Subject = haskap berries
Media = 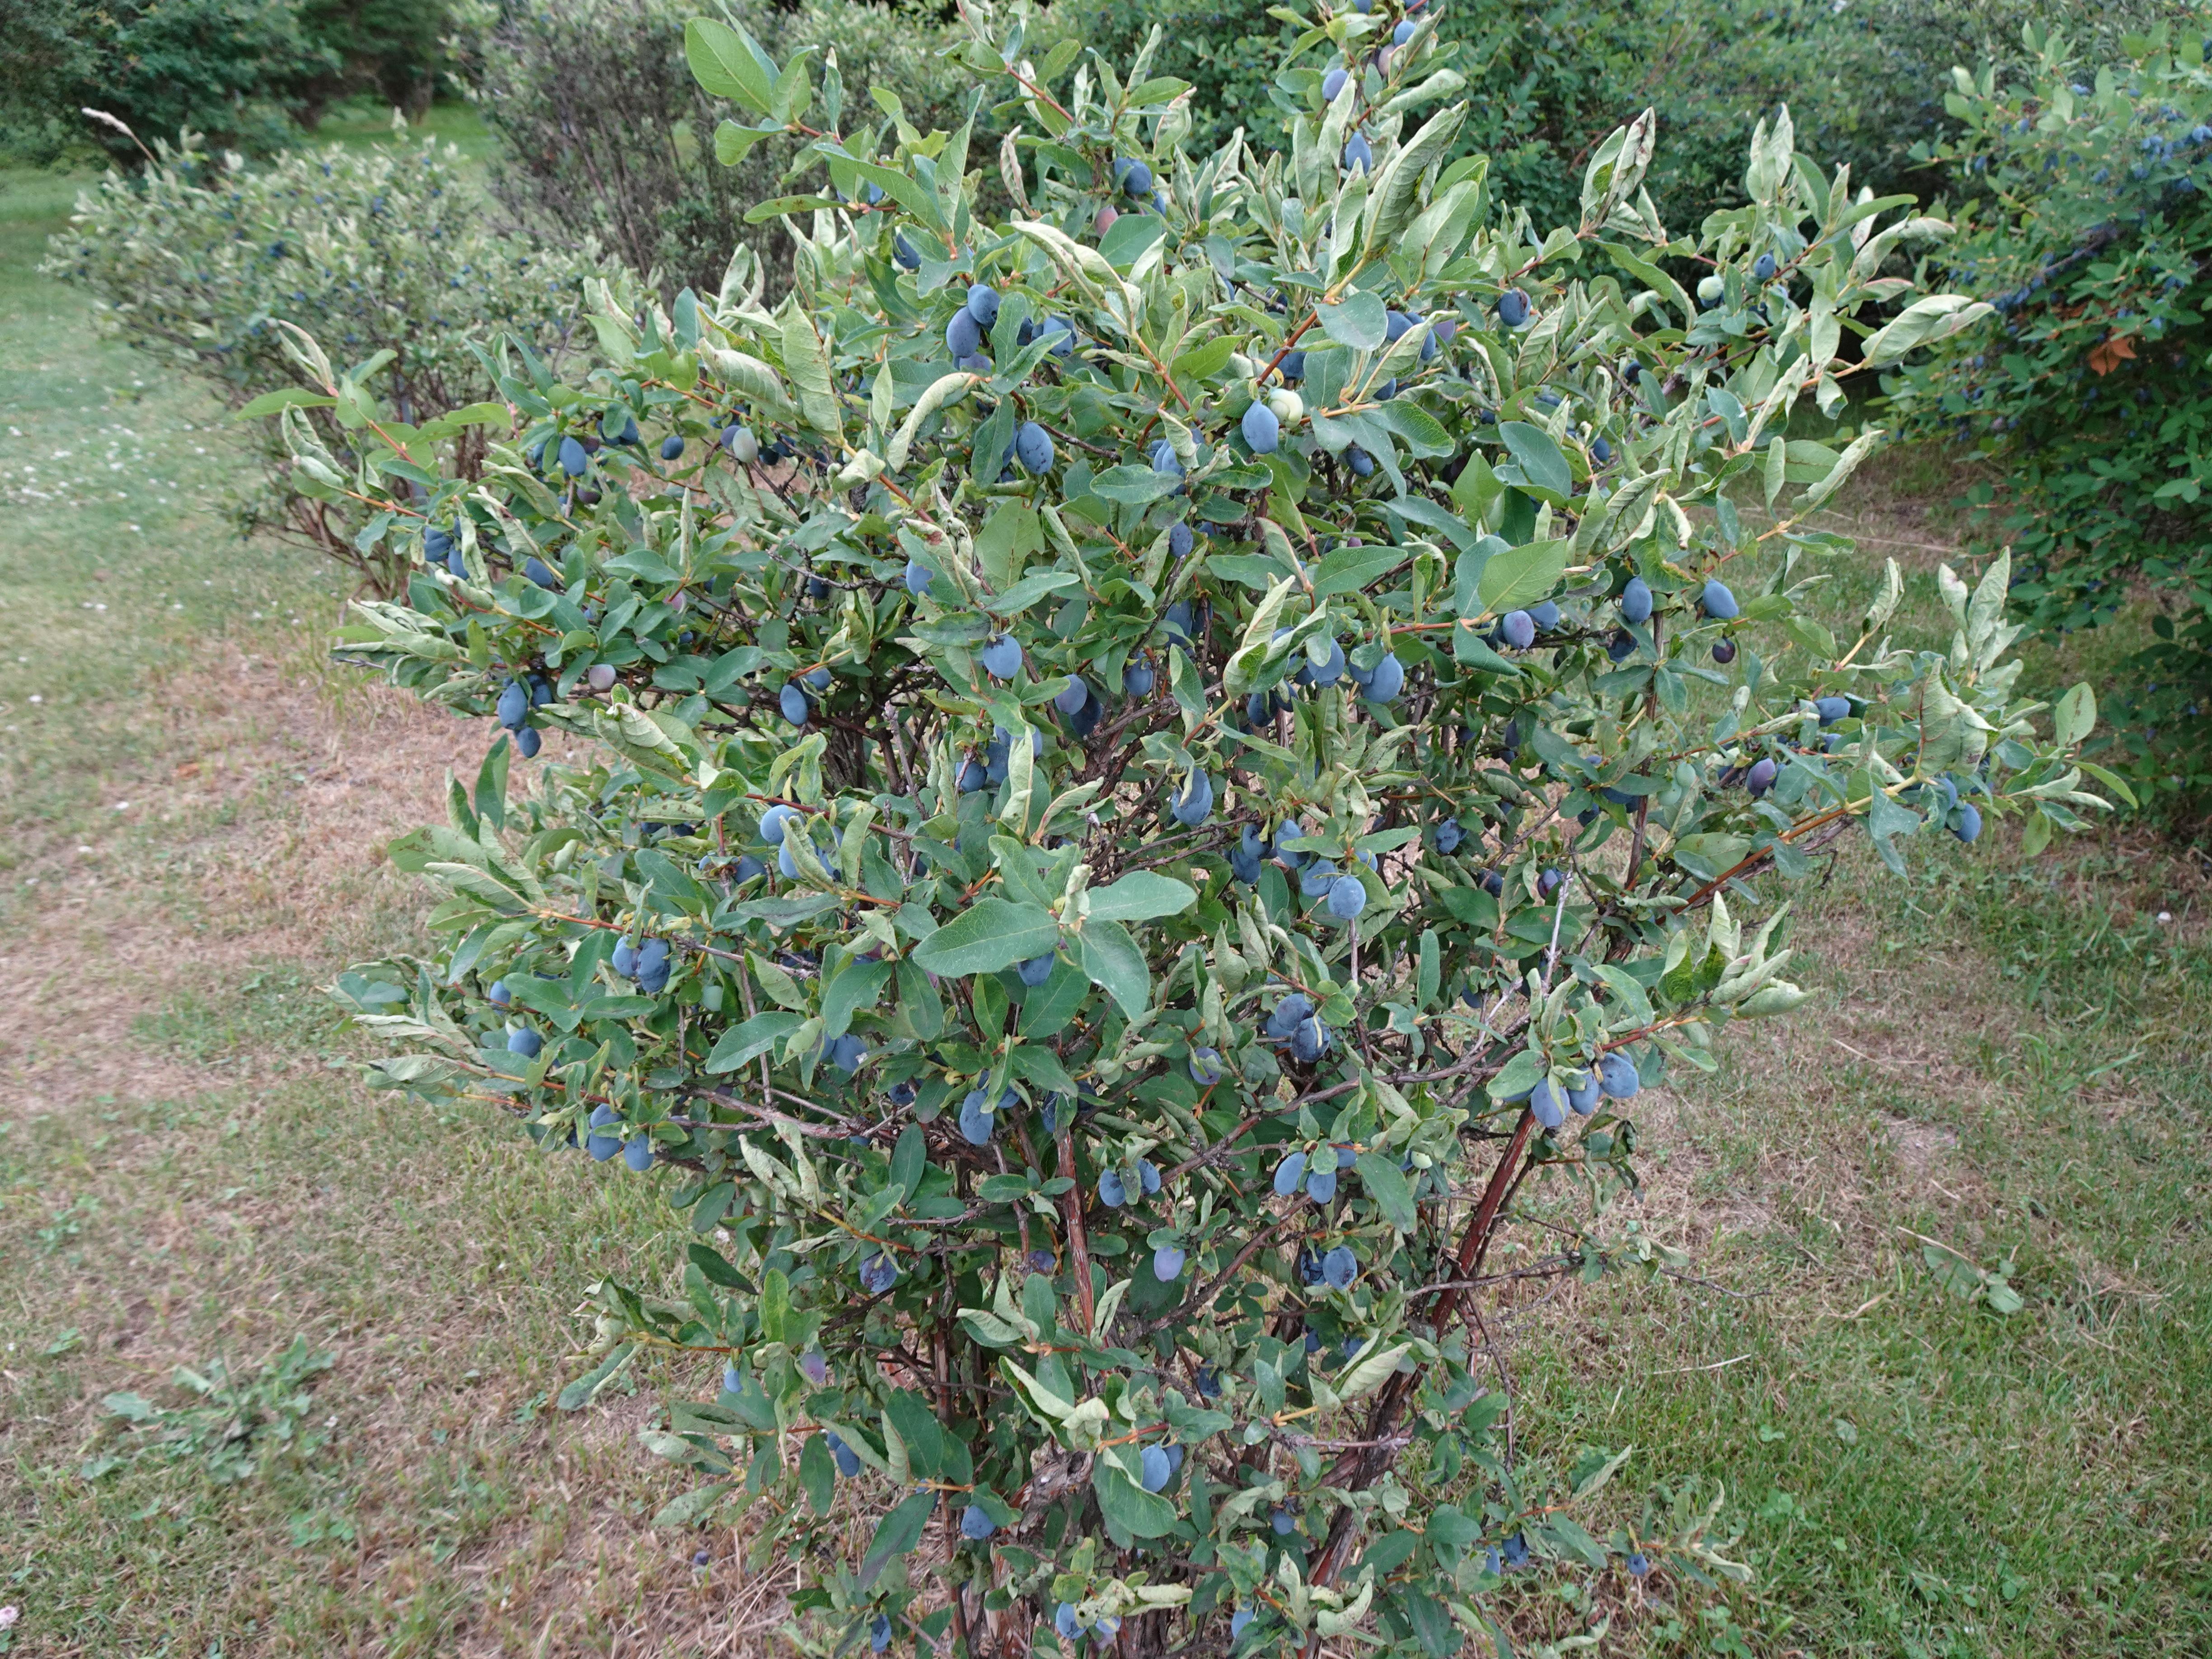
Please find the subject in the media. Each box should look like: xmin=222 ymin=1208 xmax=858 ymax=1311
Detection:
xmin=1700 ymin=297 xmax=1719 ymax=307
xmin=1052 ymin=313 xmax=1081 ymax=342
xmin=1070 ymin=688 xmax=1100 ymax=734
xmin=1593 ymin=437 xmax=1610 ymax=461
xmin=591 ymin=1105 xmax=615 ymax=1126
xmin=969 ymin=284 xmax=1001 ymax=324
xmin=1608 ymin=648 xmax=1627 ymax=662
xmin=961 ymin=1088 xmax=997 ymax=1146
xmin=871 ymin=1617 xmax=891 ymax=1647
xmin=703 ymin=987 xmax=724 ymax=1012
xmin=1539 ymin=762 xmax=1555 ymax=783
xmin=1703 ymin=579 xmax=1738 ymax=618
xmin=448 ymin=544 xmax=470 ymax=580
xmin=1268 ymin=1015 xmax=1297 ymax=1046
xmin=1648 ymin=915 xmax=1656 ymax=924
xmin=1820 ymin=734 xmax=1844 ymax=751
xmin=837 ymin=190 xmax=848 ymax=203
xmin=1378 ymin=45 xmax=1397 ymax=74
xmin=842 ymin=451 xmax=851 ymax=463
xmin=1944 ymin=778 xmax=1958 ymax=810
xmin=849 ymin=1135 xmax=872 ymax=1147
xmin=567 ymin=1129 xmax=580 ymax=1147
xmin=1372 ymin=818 xmax=1387 ymax=834
xmin=670 ymin=1115 xmax=693 ymax=1131
xmin=1293 ymin=667 xmax=1314 ymax=685
xmin=819 ymin=824 xmax=847 ymax=879
xmin=1750 ymin=303 xmax=1767 ymax=316
xmin=1500 ymin=610 xmax=1538 ymax=652
xmin=1349 ymin=0 xmax=1371 ymax=11
xmin=1147 ymin=440 xmax=1165 ymax=456
xmin=1406 ymin=0 xmax=1427 ymax=11
xmin=1137 ymin=1158 xmax=1162 ymax=1193
xmin=1788 ymin=741 xmax=1801 ymax=750
xmin=479 ymin=591 xmax=494 ymax=609
xmin=1752 ymin=758 xmax=1776 ymax=788
xmin=1265 ymin=287 xmax=1287 ymax=312
xmin=983 ymin=633 xmax=1023 ymax=677
xmin=955 ymin=760 xmax=985 ymax=792
xmin=1247 ymin=691 xmax=1279 ymax=726
xmin=1333 ymin=1141 xmax=1359 ymax=1167
xmin=1484 ymin=1544 xmax=1501 ymax=1576
xmin=1479 ymin=409 xmax=1495 ymax=425
xmin=834 ymin=1443 xmax=860 ymax=1477
xmin=1173 ymin=766 xmax=1216 ymax=825
xmin=1949 ymin=800 xmax=1981 ymax=841
xmin=1593 ymin=1055 xmax=1639 ymax=1100
xmin=1345 ymin=131 xmax=1371 ymax=173
xmin=1000 ymin=466 xmax=1015 ymax=482
xmin=1315 ymin=757 xmax=1320 ymax=778
xmin=425 ymin=535 xmax=453 ymax=562
xmin=641 ymin=821 xmax=663 ymax=833
xmin=1627 ymin=1552 xmax=1648 ymax=1575
xmin=613 ymin=944 xmax=640 ymax=975
xmin=913 ymin=861 xmax=926 ymax=878
xmin=1294 ymin=1021 xmax=1328 ymax=1061
xmin=1409 ymin=1150 xmax=1432 ymax=1169
xmin=1002 ymin=419 xmax=1018 ymax=466
xmin=906 ymin=559 xmax=934 ymax=599
xmin=1328 ymin=876 xmax=1365 ymax=919
xmin=1198 ymin=522 xmax=1213 ymax=534
xmin=1588 ymin=756 xmax=1603 ymax=764
xmin=1285 ymin=656 xmax=1305 ymax=674
xmin=1503 ymin=1534 xmax=1530 ymax=1565
xmin=1346 ymin=444 xmax=1375 ymax=477
xmin=945 ymin=306 xmax=979 ymax=358
xmin=557 ymin=434 xmax=586 ymax=476
xmin=1503 ymin=1086 xmax=1535 ymax=1102
xmin=1771 ymin=763 xmax=1788 ymax=788
xmin=857 ymin=377 xmax=872 ymax=398
xmin=666 ymin=593 xmax=684 ymax=610
xmin=887 ymin=542 xmax=895 ymax=551
xmin=1480 ymin=623 xmax=1498 ymax=647
xmin=995 ymin=723 xmax=1011 ymax=745
xmin=1459 ymin=1441 xmax=1467 ymax=1454
xmin=700 ymin=854 xmax=716 ymax=869
xmin=589 ymin=1112 xmax=626 ymax=1162
xmin=781 ymin=684 xmax=807 ymax=725
xmin=893 ymin=234 xmax=922 ymax=268
xmin=1150 ymin=190 xmax=1166 ymax=216
xmin=710 ymin=413 xmax=730 ymax=428
xmin=1406 ymin=311 xmax=1435 ymax=360
xmin=1095 ymin=343 xmax=1110 ymax=349
xmin=1499 ymin=286 xmax=1531 ymax=326
xmin=1573 ymin=343 xmax=1583 ymax=350
xmin=677 ymin=1095 xmax=691 ymax=1104
xmin=867 ymin=943 xmax=885 ymax=957
xmin=1529 ymin=600 xmax=1560 ymax=626
xmin=804 ymin=953 xmax=815 ymax=969
xmin=1538 ymin=874 xmax=1550 ymax=899
xmin=808 ymin=666 xmax=830 ymax=688
xmin=1272 ymin=627 xmax=1294 ymax=641
xmin=810 ymin=571 xmax=830 ymax=599
xmin=888 ymin=1083 xmax=914 ymax=1104
xmin=733 ymin=401 xmax=749 ymax=416
xmin=1505 ymin=718 xmax=1521 ymax=746
xmin=1570 ymin=1068 xmax=1599 ymax=1117
xmin=643 ymin=965 xmax=670 ymax=991
xmin=1191 ymin=426 xmax=1207 ymax=443
xmin=1097 ymin=203 xmax=1120 ymax=236
xmin=761 ymin=804 xmax=802 ymax=844
xmin=1242 ymin=823 xmax=1270 ymax=860
xmin=724 ymin=1371 xmax=742 ymax=1392
xmin=1192 ymin=599 xmax=1213 ymax=634
xmin=1190 ymin=1045 xmax=1222 ymax=1084
xmin=1076 ymin=1080 xmax=1098 ymax=1109
xmin=868 ymin=182 xmax=883 ymax=202
xmin=1308 ymin=1170 xmax=1338 ymax=1203
xmin=714 ymin=1085 xmax=733 ymax=1096
xmin=1056 ymin=674 xmax=1087 ymax=715
xmin=1028 ymin=725 xmax=1043 ymax=761
xmin=680 ymin=630 xmax=694 ymax=643
xmin=518 ymin=727 xmax=541 ymax=757
xmin=425 ymin=527 xmax=443 ymax=540
xmin=1043 ymin=316 xmax=1074 ymax=358
xmin=757 ymin=439 xmax=779 ymax=465
xmin=1115 ymin=155 xmax=1151 ymax=194
xmin=734 ymin=856 xmax=764 ymax=883
xmin=1232 ymin=848 xmax=1261 ymax=884
xmin=997 ymin=1087 xmax=1020 ymax=1110
xmin=580 ymin=436 xmax=598 ymax=453
xmin=964 ymin=246 xmax=974 ymax=257
xmin=1321 ymin=1247 xmax=1357 ymax=1290
xmin=1098 ymin=1166 xmax=1129 ymax=1208
xmin=1304 ymin=1329 xmax=1322 ymax=1351
xmin=1198 ymin=1356 xmax=1222 ymax=1397
xmin=1604 ymin=787 xmax=1633 ymax=803
xmin=490 ymin=981 xmax=512 ymax=1013
xmin=1578 ymin=804 xmax=1600 ymax=826
xmin=1698 ymin=275 xmax=1723 ymax=298
xmin=532 ymin=438 xmax=548 ymax=459
xmin=1153 ymin=1241 xmax=1186 ymax=1279
xmin=525 ymin=674 xmax=552 ymax=707
xmin=1170 ymin=265 xmax=1187 ymax=278
xmin=926 ymin=973 xmax=939 ymax=988
xmin=1096 ymin=1616 xmax=1122 ymax=1634
xmin=1532 ymin=1073 xmax=1570 ymax=1131
xmin=1170 ymin=522 xmax=1193 ymax=558
xmin=1357 ymin=850 xmax=1379 ymax=872
xmin=1775 ymin=734 xmax=1790 ymax=744
xmin=1462 ymin=983 xmax=1484 ymax=1008
xmin=832 ymin=1033 xmax=866 ymax=1071
xmin=1323 ymin=537 xmax=1334 ymax=555
xmin=1500 ymin=750 xmax=1517 ymax=764
xmin=1621 ymin=578 xmax=1653 ymax=622
xmin=1348 ymin=537 xmax=1362 ymax=547
xmin=779 ymin=833 xmax=816 ymax=879
xmin=1624 ymin=361 xmax=1644 ymax=383
xmin=1299 ymin=561 xmax=1307 ymax=569
xmin=639 ymin=939 xmax=669 ymax=980
xmin=827 ymin=1430 xmax=842 ymax=1450
xmin=621 ymin=415 xmax=640 ymax=441
xmin=1032 ymin=323 xmax=1043 ymax=339
xmin=1232 ymin=1602 xmax=1255 ymax=1638
xmin=1435 ymin=818 xmax=1461 ymax=855
xmin=1754 ymin=254 xmax=1774 ymax=278
xmin=596 ymin=421 xmax=620 ymax=446
xmin=784 ymin=959 xmax=797 ymax=966
xmin=1534 ymin=395 xmax=1559 ymax=405
xmin=1348 ymin=1333 xmax=1367 ymax=1353
xmin=1093 ymin=651 xmax=1111 ymax=674
xmin=624 ymin=1126 xmax=653 ymax=1174
xmin=589 ymin=664 xmax=616 ymax=689
xmin=1553 ymin=649 xmax=1563 ymax=670
xmin=1718 ymin=765 xmax=1739 ymax=784
xmin=1499 ymin=801 xmax=1513 ymax=812
xmin=1367 ymin=652 xmax=1404 ymax=702
xmin=1273 ymin=1151 xmax=1308 ymax=1195
xmin=1165 ymin=598 xmax=1194 ymax=647
xmin=1268 ymin=389 xmax=1302 ymax=426
xmin=1225 ymin=279 xmax=1236 ymax=300
xmin=1141 ymin=1445 xmax=1171 ymax=1491
xmin=976 ymin=400 xmax=988 ymax=410
xmin=1043 ymin=1089 xmax=1058 ymax=1132
xmin=777 ymin=435 xmax=795 ymax=456
xmin=1746 ymin=766 xmax=1767 ymax=798
xmin=1018 ymin=421 xmax=1054 ymax=473
xmin=1272 ymin=349 xmax=1308 ymax=379
xmin=1477 ymin=868 xmax=1502 ymax=897
xmin=660 ymin=435 xmax=684 ymax=459
xmin=1219 ymin=1371 xmax=1237 ymax=1398
xmin=1166 ymin=468 xmax=1187 ymax=497
xmin=598 ymin=450 xmax=608 ymax=465
xmin=508 ymin=1029 xmax=542 ymax=1059
xmin=1019 ymin=951 xmax=1056 ymax=987
xmin=721 ymin=425 xmax=741 ymax=447
xmin=1030 ymin=1249 xmax=1057 ymax=1274
xmin=584 ymin=609 xmax=595 ymax=620
xmin=1387 ymin=311 xmax=1410 ymax=341
xmin=1395 ymin=21 xmax=1414 ymax=48
xmin=787 ymin=1017 xmax=823 ymax=1054
xmin=704 ymin=574 xmax=719 ymax=593
xmin=1167 ymin=1442 xmax=1184 ymax=1473
xmin=1276 ymin=679 xmax=1298 ymax=711
xmin=802 ymin=1353 xmax=827 ymax=1384
xmin=1275 ymin=818 xmax=1305 ymax=869
xmin=1457 ymin=725 xmax=1476 ymax=741
xmin=1241 ymin=726 xmax=1253 ymax=735
xmin=915 ymin=1079 xmax=922 ymax=1086
xmin=1162 ymin=445 xmax=1181 ymax=473
xmin=1277 ymin=993 xmax=1313 ymax=1031
xmin=1970 ymin=787 xmax=1980 ymax=795
xmin=578 ymin=483 xmax=602 ymax=504
xmin=979 ymin=1070 xmax=991 ymax=1093
xmin=1308 ymin=638 xmax=1346 ymax=681
xmin=1323 ymin=69 xmax=1347 ymax=99
xmin=916 ymin=1480 xmax=940 ymax=1505
xmin=1544 ymin=869 xmax=1559 ymax=888
xmin=1810 ymin=697 xmax=1852 ymax=720
xmin=1676 ymin=762 xmax=1696 ymax=787
xmin=558 ymin=494 xmax=567 ymax=503
xmin=1152 ymin=438 xmax=1170 ymax=473
xmin=1274 ymin=1509 xmax=1294 ymax=1535
xmin=1302 ymin=1249 xmax=1330 ymax=1285
xmin=960 ymin=1503 xmax=997 ymax=1537
xmin=853 ymin=954 xmax=875 ymax=965
xmin=536 ymin=974 xmax=559 ymax=980
xmin=1348 ymin=662 xmax=1373 ymax=684
xmin=497 ymin=679 xmax=526 ymax=723
xmin=1303 ymin=860 xmax=1340 ymax=897
xmin=1242 ymin=401 xmax=1282 ymax=453
xmin=1435 ymin=319 xmax=1456 ymax=342
xmin=860 ymin=1247 xmax=897 ymax=1290
xmin=526 ymin=558 xmax=553 ymax=587
xmin=733 ymin=427 xmax=757 ymax=462
xmin=1712 ymin=639 xmax=1737 ymax=664
xmin=818 ymin=1035 xmax=837 ymax=1056
xmin=1612 ymin=631 xmax=1638 ymax=656
xmin=1056 ymin=1601 xmax=1088 ymax=1638
xmin=672 ymin=823 xmax=696 ymax=837
xmin=1451 ymin=461 xmax=1461 ymax=477
xmin=1371 ymin=378 xmax=1398 ymax=401
xmin=959 ymin=351 xmax=992 ymax=370
xmin=1015 ymin=316 xmax=1031 ymax=345
xmin=1627 ymin=796 xmax=1640 ymax=815
xmin=453 ymin=518 xmax=462 ymax=538
xmin=1657 ymin=780 xmax=1682 ymax=806
xmin=1122 ymin=652 xmax=1153 ymax=695
xmin=978 ymin=741 xmax=1009 ymax=784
